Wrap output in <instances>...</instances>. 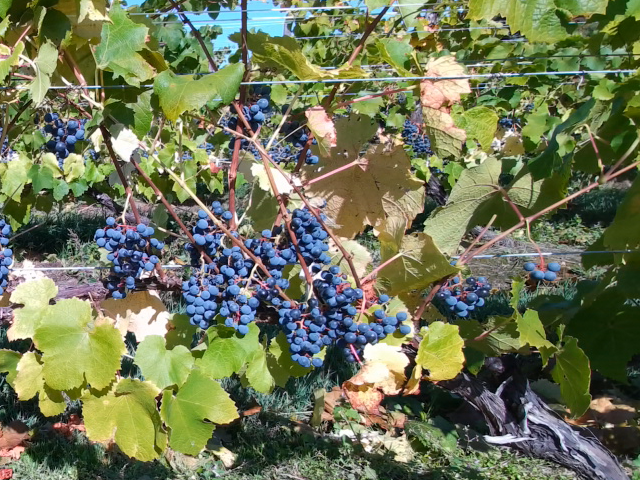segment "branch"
Wrapping results in <instances>:
<instances>
[{"instance_id": "30e6481e", "label": "branch", "mask_w": 640, "mask_h": 480, "mask_svg": "<svg viewBox=\"0 0 640 480\" xmlns=\"http://www.w3.org/2000/svg\"><path fill=\"white\" fill-rule=\"evenodd\" d=\"M246 94H247V89L246 86L243 85L240 87V97H239V103L236 100H232L231 104L234 106L238 116H237V122H236V128L235 130L230 127V126H226L223 124H220L218 122H215L214 120H210L207 117H203L200 115H196V114H192V113H186L185 117L186 118H190V119H194V120H198L201 122H205L208 125H212L213 127H216L218 129L224 130V131H228L229 133H231L234 136V146H233V151H232V155H231V164H230V171H229V185H228V210L230 212H232L233 214V219H231L228 223V230L225 229L221 223L219 222V220L217 219V217L215 216V214L208 209V207L205 205V203L202 201V199L198 196V194L189 186H187L186 184L183 183V181L181 180L180 177H178L175 173H173L172 170H170L166 165L165 162L158 156L154 155L152 153V151L146 147V145L143 142L139 143L140 148L155 162L160 164V168L166 173L168 174L172 179H174L175 182L178 183V185L185 190L186 192H188L193 198L194 200L197 202V204L201 207V209L203 210V212L208 215L214 225L218 228V230L223 233L229 240H231V245L233 247H239L240 249H242L244 251V253L253 260V262L267 275V277L269 279L273 278V274L272 272L265 267V265L261 262V259L256 256L255 254H253L249 248L243 244V242L233 236L230 233H235L236 232V227H237V223L235 222V201H236V194H235V188H236V174H237V167H238V158H239V154H240V143L241 140L245 141L247 143H250L254 146L255 149H257L258 154L260 155L261 158V163L265 168V172L267 174V179L268 182L272 188V192L274 197L276 198L278 204L280 205V209L278 210V214L276 216L275 219V224L279 225L282 219V216L284 217L285 220V226L287 228V231L291 237L292 243L295 246L299 245V241L296 238V234L290 224V217L289 214L287 212V204H288V199L289 196L286 193L282 194V197L280 196L278 189H277V185L273 179L272 173H271V169H270V165H272L277 172L279 173V175L287 181V183L293 187L295 193L303 200L304 204L307 206L309 212L311 213V215L315 216L319 222L320 225L322 226V228L325 230V232L334 240L335 244L338 246V248L342 251V253L344 254L345 258L348 261L349 267L351 269V271L354 274V278L356 281V287L357 288H361L362 287V281L361 278L359 276V271L356 268L354 262H353V258L350 256L349 251L346 249V247L342 244V242L338 239V236L323 222V220L319 217V215L317 214V212L315 211L313 205L310 203L309 199L305 196V194L300 190V188L298 187V185L290 178L289 175H286V173L282 170V168L279 166V164L273 160L268 153L262 148L261 144H260V140L259 139H252L250 137H247L245 135H242V129L244 126V130L246 131V133L249 136H253L254 132L251 130V128L249 127V123L247 122V120L244 117L243 114V110L242 107L246 104Z\"/></svg>"}, {"instance_id": "325d2c04", "label": "branch", "mask_w": 640, "mask_h": 480, "mask_svg": "<svg viewBox=\"0 0 640 480\" xmlns=\"http://www.w3.org/2000/svg\"><path fill=\"white\" fill-rule=\"evenodd\" d=\"M638 165H640V159H638L636 161H633V162L621 167L620 169L612 172L611 174H609L608 176H605L604 178H602L599 181H595L593 183L585 185L583 188H580V189L574 191L573 193H570L569 195H567L566 197L560 199L559 201L555 202L554 204L550 205L549 207H546L545 209L539 210L537 213L525 218L524 220L516 222L515 224H513L508 229L504 230L503 232H501L500 234H498L497 236H495L491 240H489V241L485 242L484 244L480 245L478 248L473 250L465 258L461 259L460 262H459V266L463 267L464 264L467 263L468 261H470L475 255L480 253L482 250L492 246L494 243H497L503 237H505L506 235L510 234L511 232H513L514 230L518 229L519 227H521L523 225H527L528 223L534 221L535 219L539 218L543 214H547V213L555 210L556 208L560 207L562 204H564V203L568 202L569 200L577 197L578 195L583 194V193L587 192L588 190H590L592 188L601 186L604 183H607L608 181L612 180L613 178L619 176L620 174H622V173L626 172L627 170H629L631 168H634V167H636Z\"/></svg>"}, {"instance_id": "170604dd", "label": "branch", "mask_w": 640, "mask_h": 480, "mask_svg": "<svg viewBox=\"0 0 640 480\" xmlns=\"http://www.w3.org/2000/svg\"><path fill=\"white\" fill-rule=\"evenodd\" d=\"M129 162L132 165V167L142 175V177L146 180V183L148 184V186L156 193L157 197L160 198V201L162 202V204L164 205V207L166 208V210L169 212V214L173 217V219L178 223V225L180 226V228L183 230V232L185 233V235L188 238L189 243L196 249V251L198 252V254L200 255V257L207 263V264H211L212 260L204 253V251L202 250V248L199 246V244L193 239V235L190 232V230L187 228V226L185 225V223L181 220V218L178 216V214L173 210V208L170 206V204L167 202V199L163 196L161 190L152 182L151 178L149 175H147V173L138 166V164L136 163V161L134 160L133 157L129 158Z\"/></svg>"}, {"instance_id": "45aa463d", "label": "branch", "mask_w": 640, "mask_h": 480, "mask_svg": "<svg viewBox=\"0 0 640 480\" xmlns=\"http://www.w3.org/2000/svg\"><path fill=\"white\" fill-rule=\"evenodd\" d=\"M99 132H100V134L102 135V137L105 140V145L107 147V150L110 153V156H111V159H112V162H113V166H114V168L116 170L117 175L119 176L120 181L122 182V186H123V188L125 190V196H126L128 202H129V204L131 206V209H132L134 220H135L136 223H140L141 219H140L139 214H138L136 203H135V201H134V199L132 197V192L130 191L129 185L127 184V180L125 179V176H124V174H123V172H122V170H121V168L119 166L118 159L116 157V153H115V151H114V149H113V147L111 145V142H110L111 133L109 132V130L106 127H104L103 124L99 125Z\"/></svg>"}, {"instance_id": "982ccf7c", "label": "branch", "mask_w": 640, "mask_h": 480, "mask_svg": "<svg viewBox=\"0 0 640 480\" xmlns=\"http://www.w3.org/2000/svg\"><path fill=\"white\" fill-rule=\"evenodd\" d=\"M388 11H389V7L388 6H385L382 10L379 11V13L376 16V18H374L373 21L370 23L369 27L367 28V31L365 32L363 37L359 40V42L357 43V45L354 48L353 52L351 53V55L346 60V64L347 65H350L353 62L354 58L356 57V55L360 51V49L363 46L364 42L371 35V33L374 30V28L377 25V23L380 22V20L382 19L383 15L386 14Z\"/></svg>"}, {"instance_id": "1ff4a987", "label": "branch", "mask_w": 640, "mask_h": 480, "mask_svg": "<svg viewBox=\"0 0 640 480\" xmlns=\"http://www.w3.org/2000/svg\"><path fill=\"white\" fill-rule=\"evenodd\" d=\"M181 19L183 20L184 24L189 28V30L193 33V35L197 37L200 45L202 46V49H203L204 53L207 56V59H208L209 63L212 66V69L214 71H218L219 67L217 66L214 58L212 57L211 51L208 49L207 44H206L205 40L203 39V36L196 30L194 25L188 20V18H187V16L185 14L181 15Z\"/></svg>"}, {"instance_id": "ea751061", "label": "branch", "mask_w": 640, "mask_h": 480, "mask_svg": "<svg viewBox=\"0 0 640 480\" xmlns=\"http://www.w3.org/2000/svg\"><path fill=\"white\" fill-rule=\"evenodd\" d=\"M248 14L243 12L240 15L241 37H240V58L243 63L248 61L247 39H248Z\"/></svg>"}, {"instance_id": "ca6c30ca", "label": "branch", "mask_w": 640, "mask_h": 480, "mask_svg": "<svg viewBox=\"0 0 640 480\" xmlns=\"http://www.w3.org/2000/svg\"><path fill=\"white\" fill-rule=\"evenodd\" d=\"M450 278H451V275L447 274L446 276H444V277L439 279V281L436 283L433 291L422 302V305H421L419 311L417 312L416 316L414 317V320H413V324L414 325H418L419 324V320L422 317V315H423L427 305L429 304V302L437 295V293L439 292V289L443 285V283L448 281Z\"/></svg>"}, {"instance_id": "1d269e1b", "label": "branch", "mask_w": 640, "mask_h": 480, "mask_svg": "<svg viewBox=\"0 0 640 480\" xmlns=\"http://www.w3.org/2000/svg\"><path fill=\"white\" fill-rule=\"evenodd\" d=\"M53 92L55 94L59 95L60 97H62L65 101H67L75 109H77L78 111L83 113L88 119H92L93 118V115L87 109H85L84 107H82L81 105L76 103L71 97H69L63 91H61V90H53Z\"/></svg>"}, {"instance_id": "1af6ec82", "label": "branch", "mask_w": 640, "mask_h": 480, "mask_svg": "<svg viewBox=\"0 0 640 480\" xmlns=\"http://www.w3.org/2000/svg\"><path fill=\"white\" fill-rule=\"evenodd\" d=\"M74 93L79 96L81 99H83L86 103H88V106L91 110H94L95 107L98 109H102L103 105L92 100L91 98H89L91 96V93L89 92V90H83L79 91V90H74Z\"/></svg>"}, {"instance_id": "2b1400db", "label": "branch", "mask_w": 640, "mask_h": 480, "mask_svg": "<svg viewBox=\"0 0 640 480\" xmlns=\"http://www.w3.org/2000/svg\"><path fill=\"white\" fill-rule=\"evenodd\" d=\"M63 57L67 63V65L69 66V68L71 69L74 77L76 78V80L81 84V85H87V82L80 76V74L77 71L76 66L73 64V62L71 61L69 55L67 53L63 54Z\"/></svg>"}, {"instance_id": "8bde2521", "label": "branch", "mask_w": 640, "mask_h": 480, "mask_svg": "<svg viewBox=\"0 0 640 480\" xmlns=\"http://www.w3.org/2000/svg\"><path fill=\"white\" fill-rule=\"evenodd\" d=\"M297 258L299 260L300 267H301L303 273L305 274V276L307 278V283L311 284L312 283V275H311V273L308 271V269L306 267L303 255L301 253H298L297 254Z\"/></svg>"}, {"instance_id": "a944a4c4", "label": "branch", "mask_w": 640, "mask_h": 480, "mask_svg": "<svg viewBox=\"0 0 640 480\" xmlns=\"http://www.w3.org/2000/svg\"><path fill=\"white\" fill-rule=\"evenodd\" d=\"M274 288H275V290H276L277 292H279V293H280L281 297H282L284 300H286L287 302H289L293 307H296V306H297V302H296L293 298H291L290 296H288V295L285 293V291H284V290H283V289H282L278 284H275V285H274Z\"/></svg>"}, {"instance_id": "afce2bb1", "label": "branch", "mask_w": 640, "mask_h": 480, "mask_svg": "<svg viewBox=\"0 0 640 480\" xmlns=\"http://www.w3.org/2000/svg\"><path fill=\"white\" fill-rule=\"evenodd\" d=\"M341 87L340 83H336L334 85L333 90L331 91L330 95L327 97L325 103H324V109L328 110L329 106L331 104L332 99L335 97L336 93L338 92L339 88Z\"/></svg>"}, {"instance_id": "7c5c6f52", "label": "branch", "mask_w": 640, "mask_h": 480, "mask_svg": "<svg viewBox=\"0 0 640 480\" xmlns=\"http://www.w3.org/2000/svg\"><path fill=\"white\" fill-rule=\"evenodd\" d=\"M10 75L18 77L20 79H25V80H28V81H33L34 80L33 76H30V75H27V74H23V73H20L18 71H11Z\"/></svg>"}, {"instance_id": "46de074c", "label": "branch", "mask_w": 640, "mask_h": 480, "mask_svg": "<svg viewBox=\"0 0 640 480\" xmlns=\"http://www.w3.org/2000/svg\"><path fill=\"white\" fill-rule=\"evenodd\" d=\"M304 158H305V151H302L300 156H299V158H298V160H297V164H296V167H295V171L296 172H300L301 171V166H302Z\"/></svg>"}, {"instance_id": "725ea6d5", "label": "branch", "mask_w": 640, "mask_h": 480, "mask_svg": "<svg viewBox=\"0 0 640 480\" xmlns=\"http://www.w3.org/2000/svg\"><path fill=\"white\" fill-rule=\"evenodd\" d=\"M314 137H315V134H314V133H310V134H309L308 140H307V142H306V144H305V148H306V149H309V148L311 147V144H312V142H313Z\"/></svg>"}, {"instance_id": "419ea82b", "label": "branch", "mask_w": 640, "mask_h": 480, "mask_svg": "<svg viewBox=\"0 0 640 480\" xmlns=\"http://www.w3.org/2000/svg\"><path fill=\"white\" fill-rule=\"evenodd\" d=\"M155 267H156V270L158 271V274H159L161 277L166 276V273L163 271V269H162V267H161V265H160V263H159V262H156V263H155Z\"/></svg>"}]
</instances>
